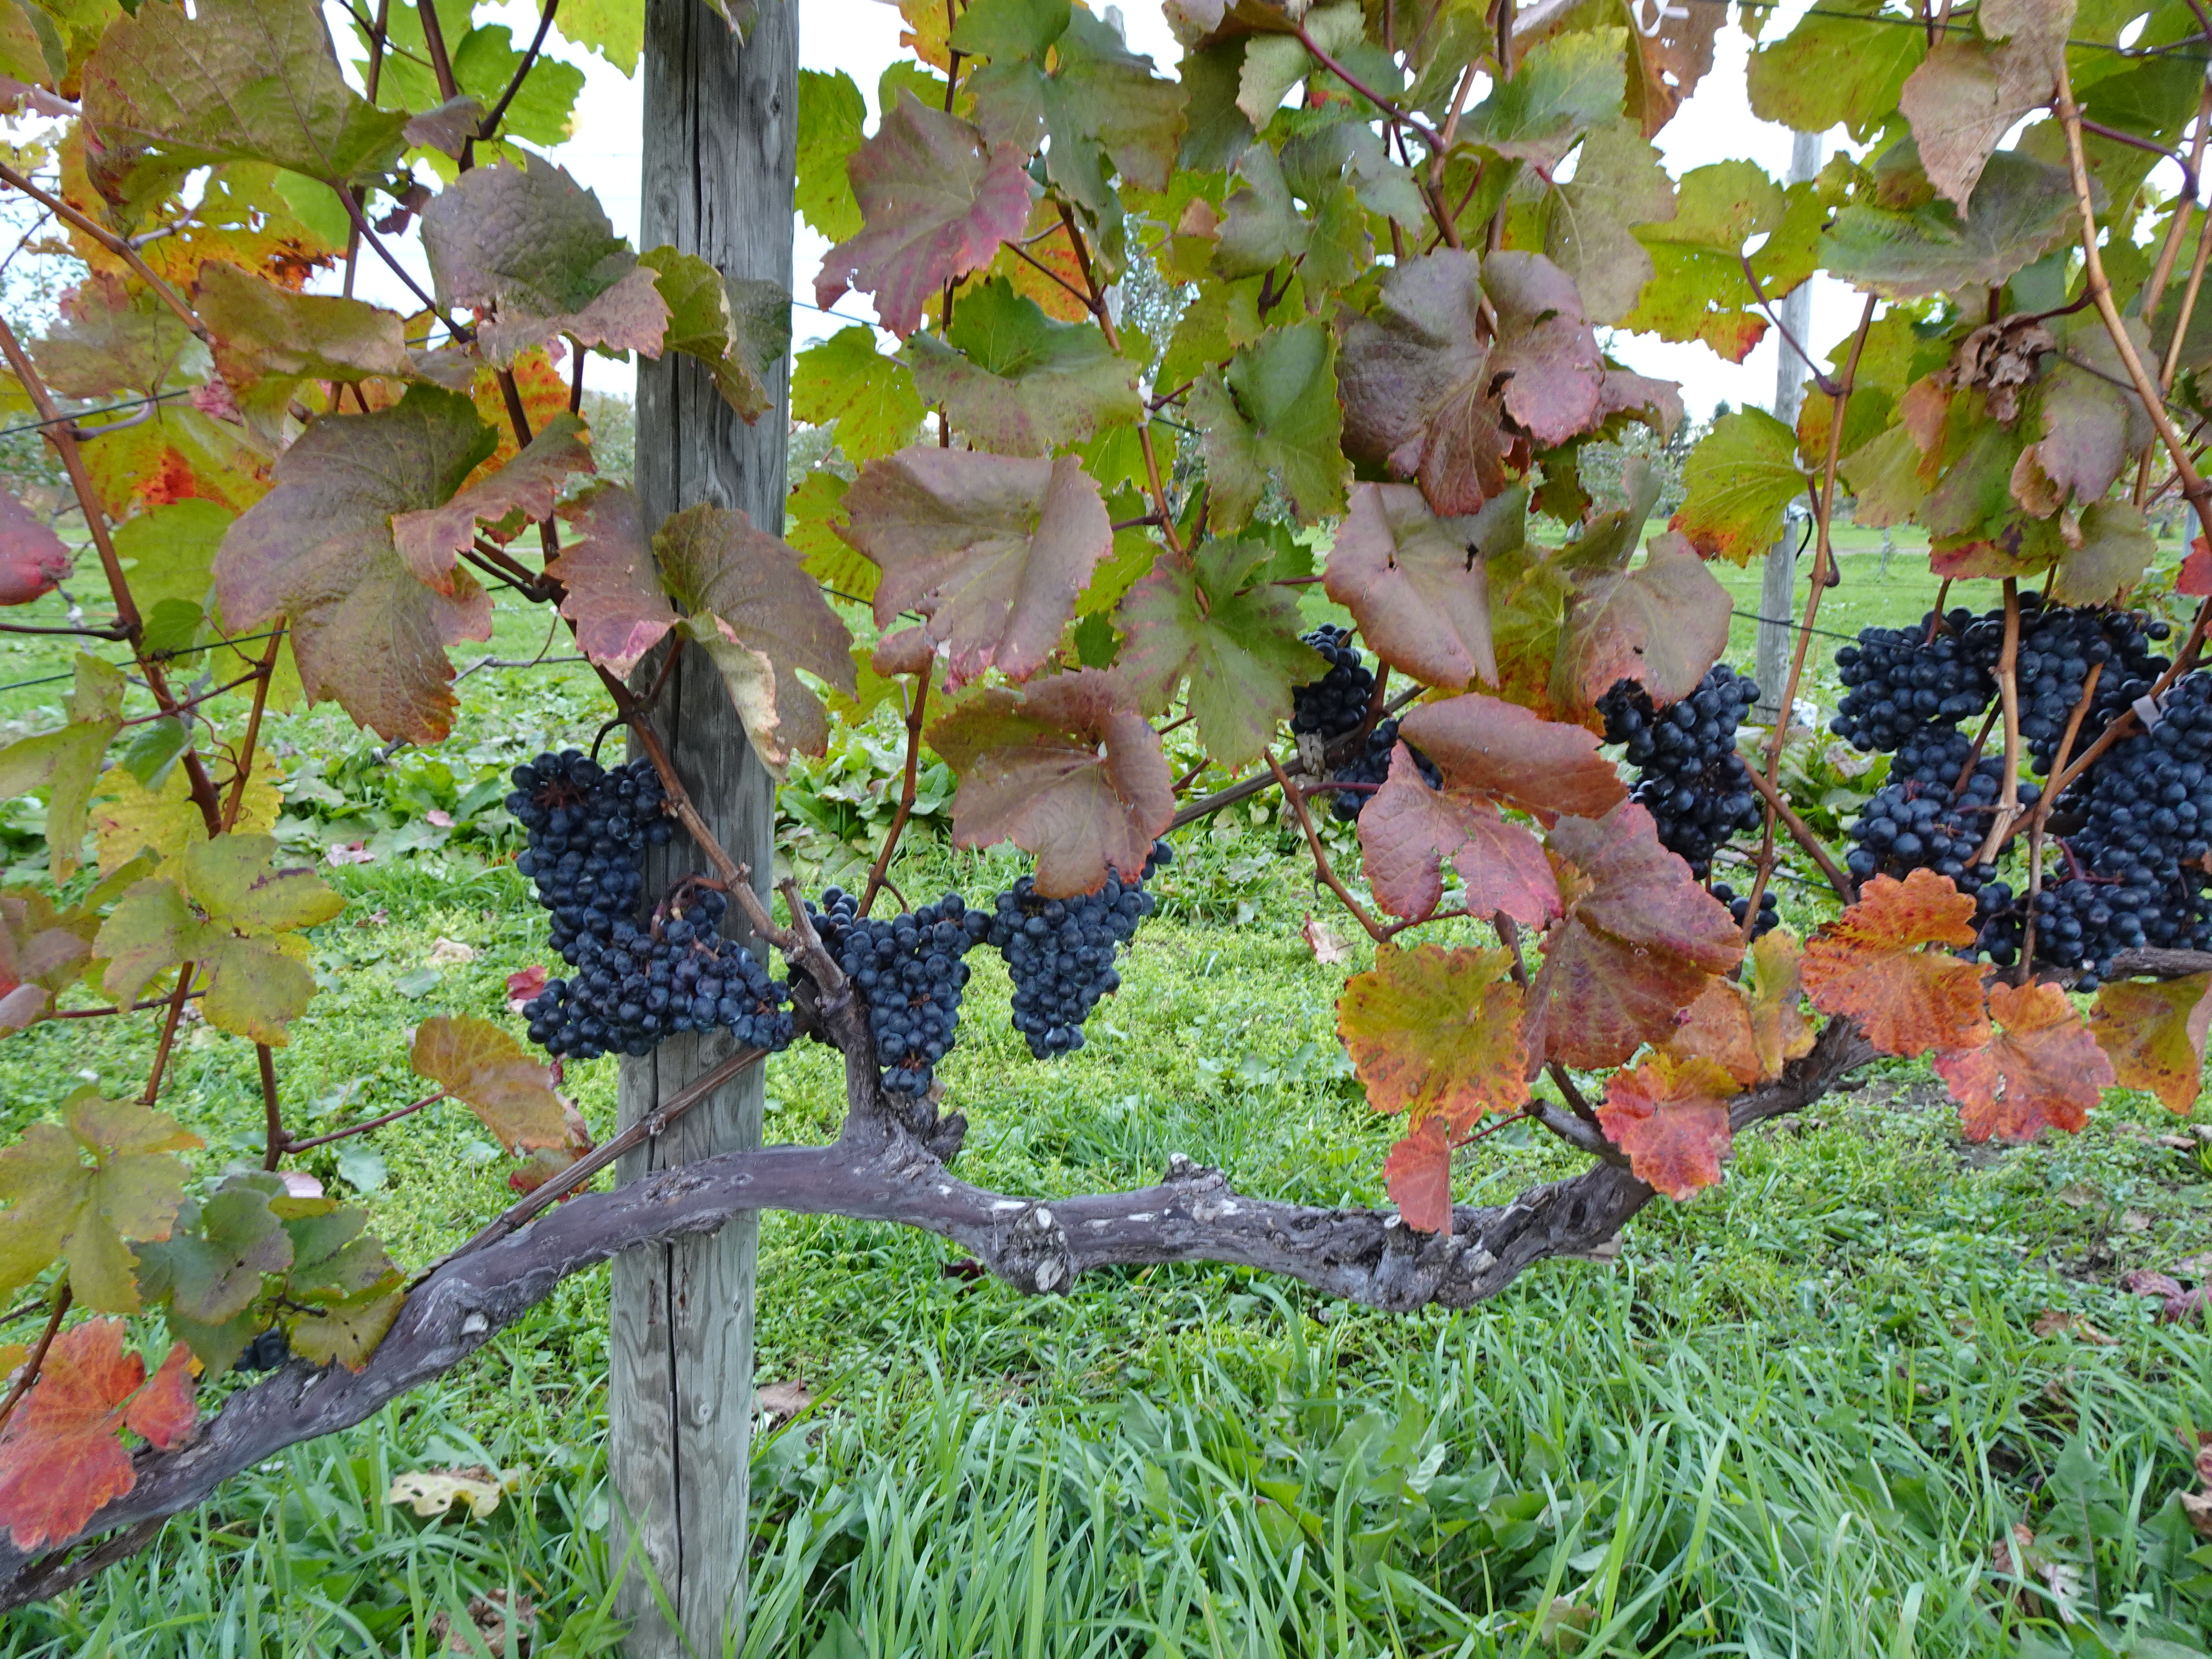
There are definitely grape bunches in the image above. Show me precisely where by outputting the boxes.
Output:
[1625,665,1753,886]
[589,888,794,1051]
[524,950,666,1061]
[1979,591,2170,776]
[1289,622,1444,849]
[2140,863,2212,952]
[2054,669,2212,912]
[1141,840,1172,880]
[1596,653,1718,769]
[786,885,857,1054]
[2010,874,2147,992]
[1829,626,1935,753]
[1912,607,1987,721]
[1841,716,2041,887]
[987,865,1155,1058]
[1948,883,2015,966]
[505,748,642,967]
[1699,880,1779,942]
[596,757,674,850]
[829,893,990,1098]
